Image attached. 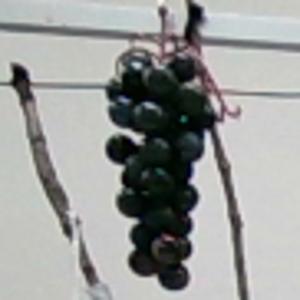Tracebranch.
Instances as JSON below:
<instances>
[{
    "label": "branch",
    "mask_w": 300,
    "mask_h": 300,
    "mask_svg": "<svg viewBox=\"0 0 300 300\" xmlns=\"http://www.w3.org/2000/svg\"><path fill=\"white\" fill-rule=\"evenodd\" d=\"M11 78L8 80L18 93L22 125L33 159L34 174L44 193L46 204L61 225L64 236L72 245L82 285L89 289L93 300H113L112 291L104 285L94 260L85 244L81 217L71 209L65 188L55 170L43 132L31 89V74L28 68L16 61L9 62Z\"/></svg>",
    "instance_id": "branch-1"
},
{
    "label": "branch",
    "mask_w": 300,
    "mask_h": 300,
    "mask_svg": "<svg viewBox=\"0 0 300 300\" xmlns=\"http://www.w3.org/2000/svg\"><path fill=\"white\" fill-rule=\"evenodd\" d=\"M187 11L186 23L182 31L180 48L188 55L203 57V38L208 17L205 8L196 0H184Z\"/></svg>",
    "instance_id": "branch-3"
},
{
    "label": "branch",
    "mask_w": 300,
    "mask_h": 300,
    "mask_svg": "<svg viewBox=\"0 0 300 300\" xmlns=\"http://www.w3.org/2000/svg\"><path fill=\"white\" fill-rule=\"evenodd\" d=\"M199 83L201 84V87H202V88L208 90L209 93H210V89H209V78H208L207 71H205L203 77L199 79Z\"/></svg>",
    "instance_id": "branch-4"
},
{
    "label": "branch",
    "mask_w": 300,
    "mask_h": 300,
    "mask_svg": "<svg viewBox=\"0 0 300 300\" xmlns=\"http://www.w3.org/2000/svg\"><path fill=\"white\" fill-rule=\"evenodd\" d=\"M213 147V156L220 174L221 189L227 212V225L233 254L234 294L236 300H249L247 286V260L244 253V222L238 207V197L234 186L231 164L222 147L218 124L209 131Z\"/></svg>",
    "instance_id": "branch-2"
}]
</instances>
